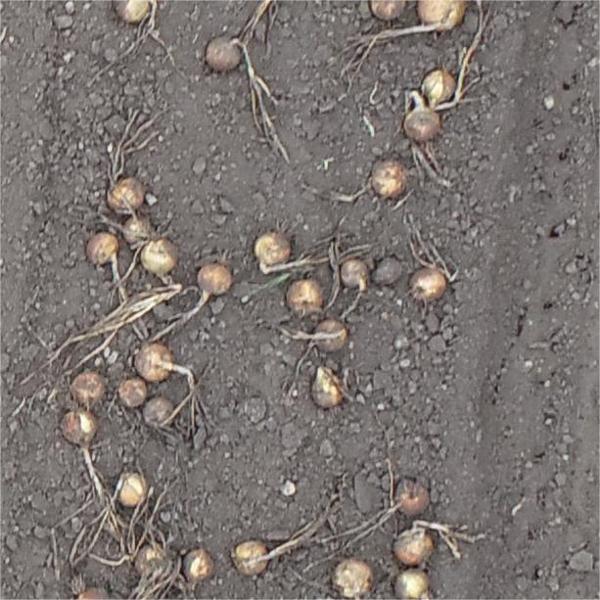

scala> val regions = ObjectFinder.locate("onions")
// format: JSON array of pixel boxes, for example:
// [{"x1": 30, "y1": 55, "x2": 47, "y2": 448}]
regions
[
  {"x1": 395, "y1": 569, "x2": 430, "y2": 598},
  {"x1": 372, "y1": 258, "x2": 403, "y2": 284},
  {"x1": 118, "y1": 376, "x2": 147, "y2": 405},
  {"x1": 367, "y1": 0, "x2": 403, "y2": 21},
  {"x1": 123, "y1": 218, "x2": 153, "y2": 245},
  {"x1": 255, "y1": 230, "x2": 290, "y2": 267},
  {"x1": 135, "y1": 342, "x2": 172, "y2": 381},
  {"x1": 410, "y1": 266, "x2": 445, "y2": 300},
  {"x1": 205, "y1": 35, "x2": 238, "y2": 70},
  {"x1": 368, "y1": 159, "x2": 405, "y2": 199},
  {"x1": 286, "y1": 275, "x2": 322, "y2": 315},
  {"x1": 394, "y1": 478, "x2": 428, "y2": 513},
  {"x1": 311, "y1": 320, "x2": 345, "y2": 349},
  {"x1": 135, "y1": 541, "x2": 173, "y2": 587},
  {"x1": 182, "y1": 548, "x2": 214, "y2": 579},
  {"x1": 108, "y1": 175, "x2": 144, "y2": 212},
  {"x1": 139, "y1": 238, "x2": 174, "y2": 273},
  {"x1": 416, "y1": 0, "x2": 467, "y2": 30},
  {"x1": 234, "y1": 540, "x2": 268, "y2": 573},
  {"x1": 196, "y1": 261, "x2": 230, "y2": 294},
  {"x1": 404, "y1": 106, "x2": 440, "y2": 140},
  {"x1": 70, "y1": 369, "x2": 105, "y2": 404},
  {"x1": 75, "y1": 586, "x2": 121, "y2": 600},
  {"x1": 117, "y1": 473, "x2": 146, "y2": 507},
  {"x1": 334, "y1": 560, "x2": 375, "y2": 599},
  {"x1": 59, "y1": 410, "x2": 98, "y2": 445},
  {"x1": 85, "y1": 232, "x2": 119, "y2": 263},
  {"x1": 308, "y1": 370, "x2": 343, "y2": 406},
  {"x1": 117, "y1": 0, "x2": 152, "y2": 25},
  {"x1": 392, "y1": 527, "x2": 431, "y2": 565},
  {"x1": 340, "y1": 258, "x2": 369, "y2": 288},
  {"x1": 421, "y1": 70, "x2": 453, "y2": 102},
  {"x1": 143, "y1": 395, "x2": 174, "y2": 426}
]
